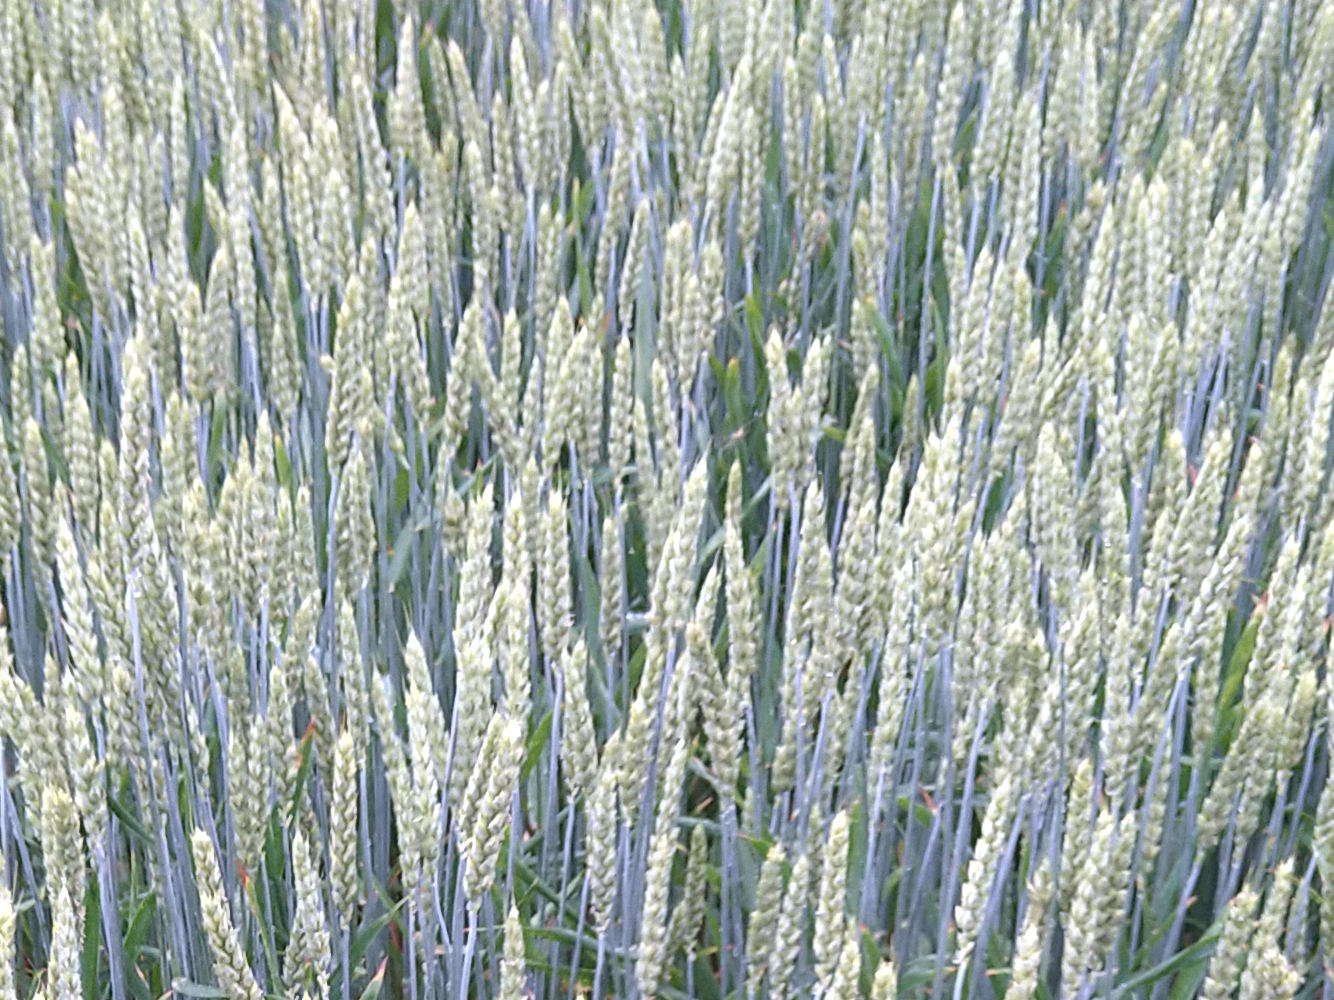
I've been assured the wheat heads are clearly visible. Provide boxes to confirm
[1065,875,1133,992]
[1317,438,1334,512]
[1059,761,1095,898]
[641,7,662,109]
[41,652,61,722]
[1138,726,1172,874]
[0,400,21,535]
[148,136,167,237]
[281,876,329,995]
[731,0,748,56]
[830,658,870,769]
[1178,0,1213,89]
[72,398,98,531]
[361,3,376,89]
[902,376,918,455]
[1320,875,1334,964]
[35,243,66,359]
[13,674,66,787]
[119,47,147,129]
[960,409,982,500]
[1044,306,1060,368]
[0,900,25,1000]
[1291,0,1307,59]
[761,0,782,60]
[403,208,429,313]
[449,654,482,805]
[788,214,820,314]
[611,340,632,469]
[276,84,295,119]
[620,204,650,301]
[1228,0,1258,84]
[306,658,340,767]
[20,0,50,75]
[654,184,666,241]
[180,396,202,481]
[1270,343,1295,401]
[1272,1,1289,68]
[1159,143,1178,267]
[1,0,32,84]
[219,117,229,178]
[194,31,242,136]
[1103,360,1125,476]
[609,133,632,220]
[189,479,208,534]
[17,761,38,835]
[1061,308,1084,359]
[188,836,280,1000]
[473,341,524,472]
[974,0,997,71]
[814,549,835,642]
[187,607,206,670]
[502,586,531,715]
[477,0,493,30]
[616,652,664,815]
[783,59,815,183]
[100,439,120,508]
[1305,0,1325,28]
[542,127,559,192]
[950,246,972,356]
[768,44,784,71]
[351,75,396,225]
[370,399,408,453]
[1136,201,1151,315]
[330,732,359,916]
[860,0,884,129]
[297,788,318,868]
[688,630,743,801]
[332,193,357,269]
[103,81,125,160]
[1120,312,1147,450]
[467,145,490,273]
[990,346,1042,470]
[1011,272,1032,375]
[537,494,565,662]
[1053,459,1075,623]
[862,963,895,1000]
[1004,106,1026,211]
[807,0,829,88]
[24,422,52,556]
[745,0,760,58]
[279,22,295,74]
[974,58,1012,174]
[163,1,184,60]
[1229,179,1266,295]
[1226,55,1257,134]
[101,13,121,87]
[1256,182,1296,288]
[892,0,915,79]
[1291,7,1324,70]
[933,0,962,154]
[248,188,279,277]
[681,220,695,286]
[330,0,359,125]
[496,908,526,1000]
[1315,1,1334,108]
[172,75,188,192]
[947,19,976,142]
[398,19,428,157]
[944,165,961,269]
[533,221,563,339]
[654,741,690,848]
[203,178,227,235]
[455,493,494,657]
[1120,0,1136,77]
[1040,0,1055,35]
[1068,189,1107,300]
[0,10,15,89]
[249,722,271,840]
[308,155,324,210]
[217,474,238,583]
[503,494,526,581]
[988,89,1009,177]
[466,720,526,895]
[430,445,454,521]
[200,896,275,1000]
[839,369,878,481]
[662,468,708,627]
[820,31,840,153]
[183,40,202,138]
[52,790,86,916]
[70,0,93,88]
[865,728,892,801]
[340,603,368,740]
[1061,813,1114,998]
[158,309,174,394]
[324,121,345,177]
[124,340,139,380]
[1000,86,1042,219]
[212,523,231,631]
[670,51,695,179]
[940,354,963,433]
[792,36,811,91]
[1251,0,1275,65]
[1194,67,1220,137]
[79,8,99,66]
[986,917,1042,1000]
[833,499,878,645]
[489,0,507,26]
[770,652,829,788]
[1194,206,1231,313]
[840,43,860,170]
[236,434,250,485]
[260,154,273,188]
[0,173,15,273]
[117,676,145,789]
[1310,746,1334,869]
[684,824,708,948]
[510,39,530,104]
[1032,426,1056,544]
[637,833,674,998]
[1022,609,1095,764]
[1085,16,1101,159]
[1014,550,1036,626]
[486,197,502,281]
[293,833,331,979]
[1223,958,1266,1000]
[722,462,741,542]
[981,634,1018,731]
[401,147,418,211]
[766,333,791,495]
[999,489,1027,548]
[65,193,108,314]
[386,276,402,358]
[653,362,678,467]
[1202,2,1238,72]
[166,205,188,295]
[658,657,689,780]
[334,96,359,199]
[721,12,733,60]
[694,94,726,192]
[256,407,275,519]
[372,673,402,788]
[645,501,668,586]
[427,692,452,786]
[271,268,303,387]
[588,767,619,927]
[322,0,336,45]
[511,202,530,283]
[1094,368,1111,450]
[613,3,645,101]
[1046,354,1085,422]
[327,418,369,562]
[1043,49,1068,155]
[128,212,160,369]
[1290,876,1311,963]
[87,577,133,671]
[1063,177,1104,257]
[592,214,615,292]
[740,115,761,240]
[904,92,928,217]
[928,550,954,657]
[1111,8,1160,139]
[633,402,656,507]
[1328,637,1334,751]
[330,287,359,464]
[405,634,432,708]
[612,29,624,77]
[589,352,604,462]
[601,519,624,648]
[710,67,749,191]
[1196,891,1260,1000]
[1279,675,1317,775]
[295,163,322,289]
[663,226,678,321]
[838,422,876,567]
[1245,106,1261,211]
[904,438,939,530]
[931,420,966,517]
[1182,140,1196,265]
[71,116,93,179]
[408,693,437,850]
[562,647,598,798]
[724,527,754,682]
[1264,67,1274,127]
[1106,489,1132,640]
[48,0,65,82]
[1101,52,1119,134]
[1218,0,1247,78]
[435,309,475,463]
[492,94,513,225]
[233,213,256,325]
[0,13,7,97]
[1230,311,1246,398]
[957,250,993,393]
[1234,714,1283,844]
[190,517,210,628]
[149,49,164,120]
[554,23,591,145]
[302,0,327,109]
[559,62,570,166]
[1140,81,1167,148]
[1283,388,1310,505]
[780,0,796,56]
[119,368,151,563]
[701,245,724,349]
[998,864,1053,1000]
[1279,68,1287,152]
[950,502,975,543]
[1069,459,1105,570]
[98,502,120,598]
[420,157,437,273]
[680,278,699,383]
[4,677,35,761]
[979,270,1012,398]
[271,487,290,622]
[204,54,211,133]
[592,8,637,145]
[433,219,453,320]
[924,8,944,87]
[28,545,53,614]
[351,459,376,581]
[1102,816,1138,947]
[61,352,81,452]
[442,135,461,213]
[1299,525,1334,664]
[228,128,246,213]
[65,163,85,203]
[873,133,888,260]
[851,228,870,300]
[1098,246,1116,311]
[520,359,542,457]
[1022,631,1047,700]
[1104,175,1145,352]
[128,138,144,211]
[889,64,917,150]
[911,531,934,672]
[1170,90,1187,140]
[1288,101,1314,171]
[1266,575,1309,700]
[1062,24,1085,139]
[1303,350,1334,497]
[1026,101,1040,241]
[1134,626,1183,729]
[264,178,279,248]
[228,647,250,731]
[1118,122,1137,206]
[277,119,302,241]
[1186,159,1215,271]
[144,0,152,56]
[784,608,806,708]
[46,879,85,1000]
[248,0,270,100]
[796,175,808,218]
[1251,203,1272,258]
[258,299,272,383]
[79,132,108,254]
[1196,703,1267,845]
[1211,255,1236,338]
[655,31,671,118]
[746,847,786,978]
[581,297,609,353]
[517,86,536,175]
[798,342,823,483]
[1081,212,1114,325]
[375,341,390,400]
[355,230,377,366]
[135,543,181,641]
[204,243,231,378]
[55,523,102,694]
[696,566,721,638]
[1233,444,1264,526]
[33,72,53,198]
[450,44,482,143]
[1257,393,1289,484]
[1311,262,1334,373]
[1188,288,1211,375]
[1285,134,1322,248]
[1299,10,1331,92]
[179,290,202,396]
[158,645,203,777]
[1133,510,1174,645]
[150,1,174,52]
[3,120,30,238]
[223,728,253,867]
[435,151,449,222]
[970,530,1004,691]
[1100,617,1133,792]
[162,392,178,438]
[1179,521,1250,657]
[542,334,588,460]
[160,436,185,542]
[815,813,850,980]
[41,792,59,898]
[1192,613,1225,748]
[1059,378,1090,487]
[1138,326,1177,453]
[101,165,129,288]
[769,876,811,991]
[688,26,710,124]
[1094,0,1118,58]
[789,485,825,635]
[1261,233,1282,349]
[268,665,294,823]
[536,78,549,148]
[1151,178,1166,318]
[454,717,503,843]
[394,768,419,903]
[592,53,609,145]
[52,476,69,521]
[66,709,108,832]
[429,41,454,127]
[1138,7,1182,76]
[106,695,127,770]
[826,944,862,1000]
[271,327,291,407]
[1211,123,1231,167]
[850,302,869,380]
[1315,626,1334,713]
[541,302,565,466]
[287,591,322,700]
[119,0,139,53]
[877,462,904,550]
[1243,546,1298,705]
[1163,440,1231,576]
[758,57,770,161]
[313,106,328,150]
[859,528,903,647]
[243,486,272,616]
[953,781,1015,956]
[296,491,316,596]
[992,683,1027,790]
[874,571,912,751]
[950,529,986,704]
[313,177,339,286]
[11,346,30,445]
[510,0,534,43]
[400,311,431,411]
[1024,21,1040,93]
[1220,865,1295,1000]
[808,94,825,203]
[860,198,870,234]
[1002,0,1021,64]
[500,313,521,424]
